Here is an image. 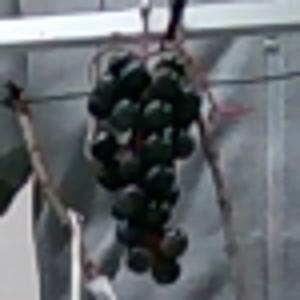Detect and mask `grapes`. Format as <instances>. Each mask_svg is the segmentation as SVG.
I'll use <instances>...</instances> for the list:
<instances>
[{
	"label": "grapes",
	"mask_w": 300,
	"mask_h": 300,
	"mask_svg": "<svg viewBox=\"0 0 300 300\" xmlns=\"http://www.w3.org/2000/svg\"><path fill=\"white\" fill-rule=\"evenodd\" d=\"M185 54L166 48L143 59L126 49L115 51L89 95L87 111L118 133L131 130L126 143L108 128L89 144L99 185L119 194L110 205L119 220L115 235L127 249L126 267L135 276L148 271L160 286L176 284L189 247L187 233L170 225L181 198L176 162L197 149L191 135L193 113L204 102Z\"/></svg>",
	"instance_id": "obj_1"
}]
</instances>
